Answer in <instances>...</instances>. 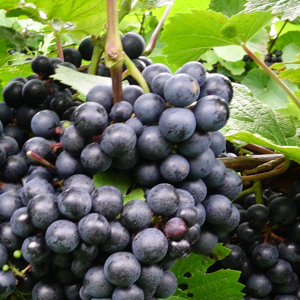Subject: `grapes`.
Masks as SVG:
<instances>
[{
	"label": "grapes",
	"mask_w": 300,
	"mask_h": 300,
	"mask_svg": "<svg viewBox=\"0 0 300 300\" xmlns=\"http://www.w3.org/2000/svg\"><path fill=\"white\" fill-rule=\"evenodd\" d=\"M139 85L93 87L85 102L33 75L0 103V298L156 300L170 270L233 233L239 174L218 159L231 81L199 62Z\"/></svg>",
	"instance_id": "grapes-1"
}]
</instances>
